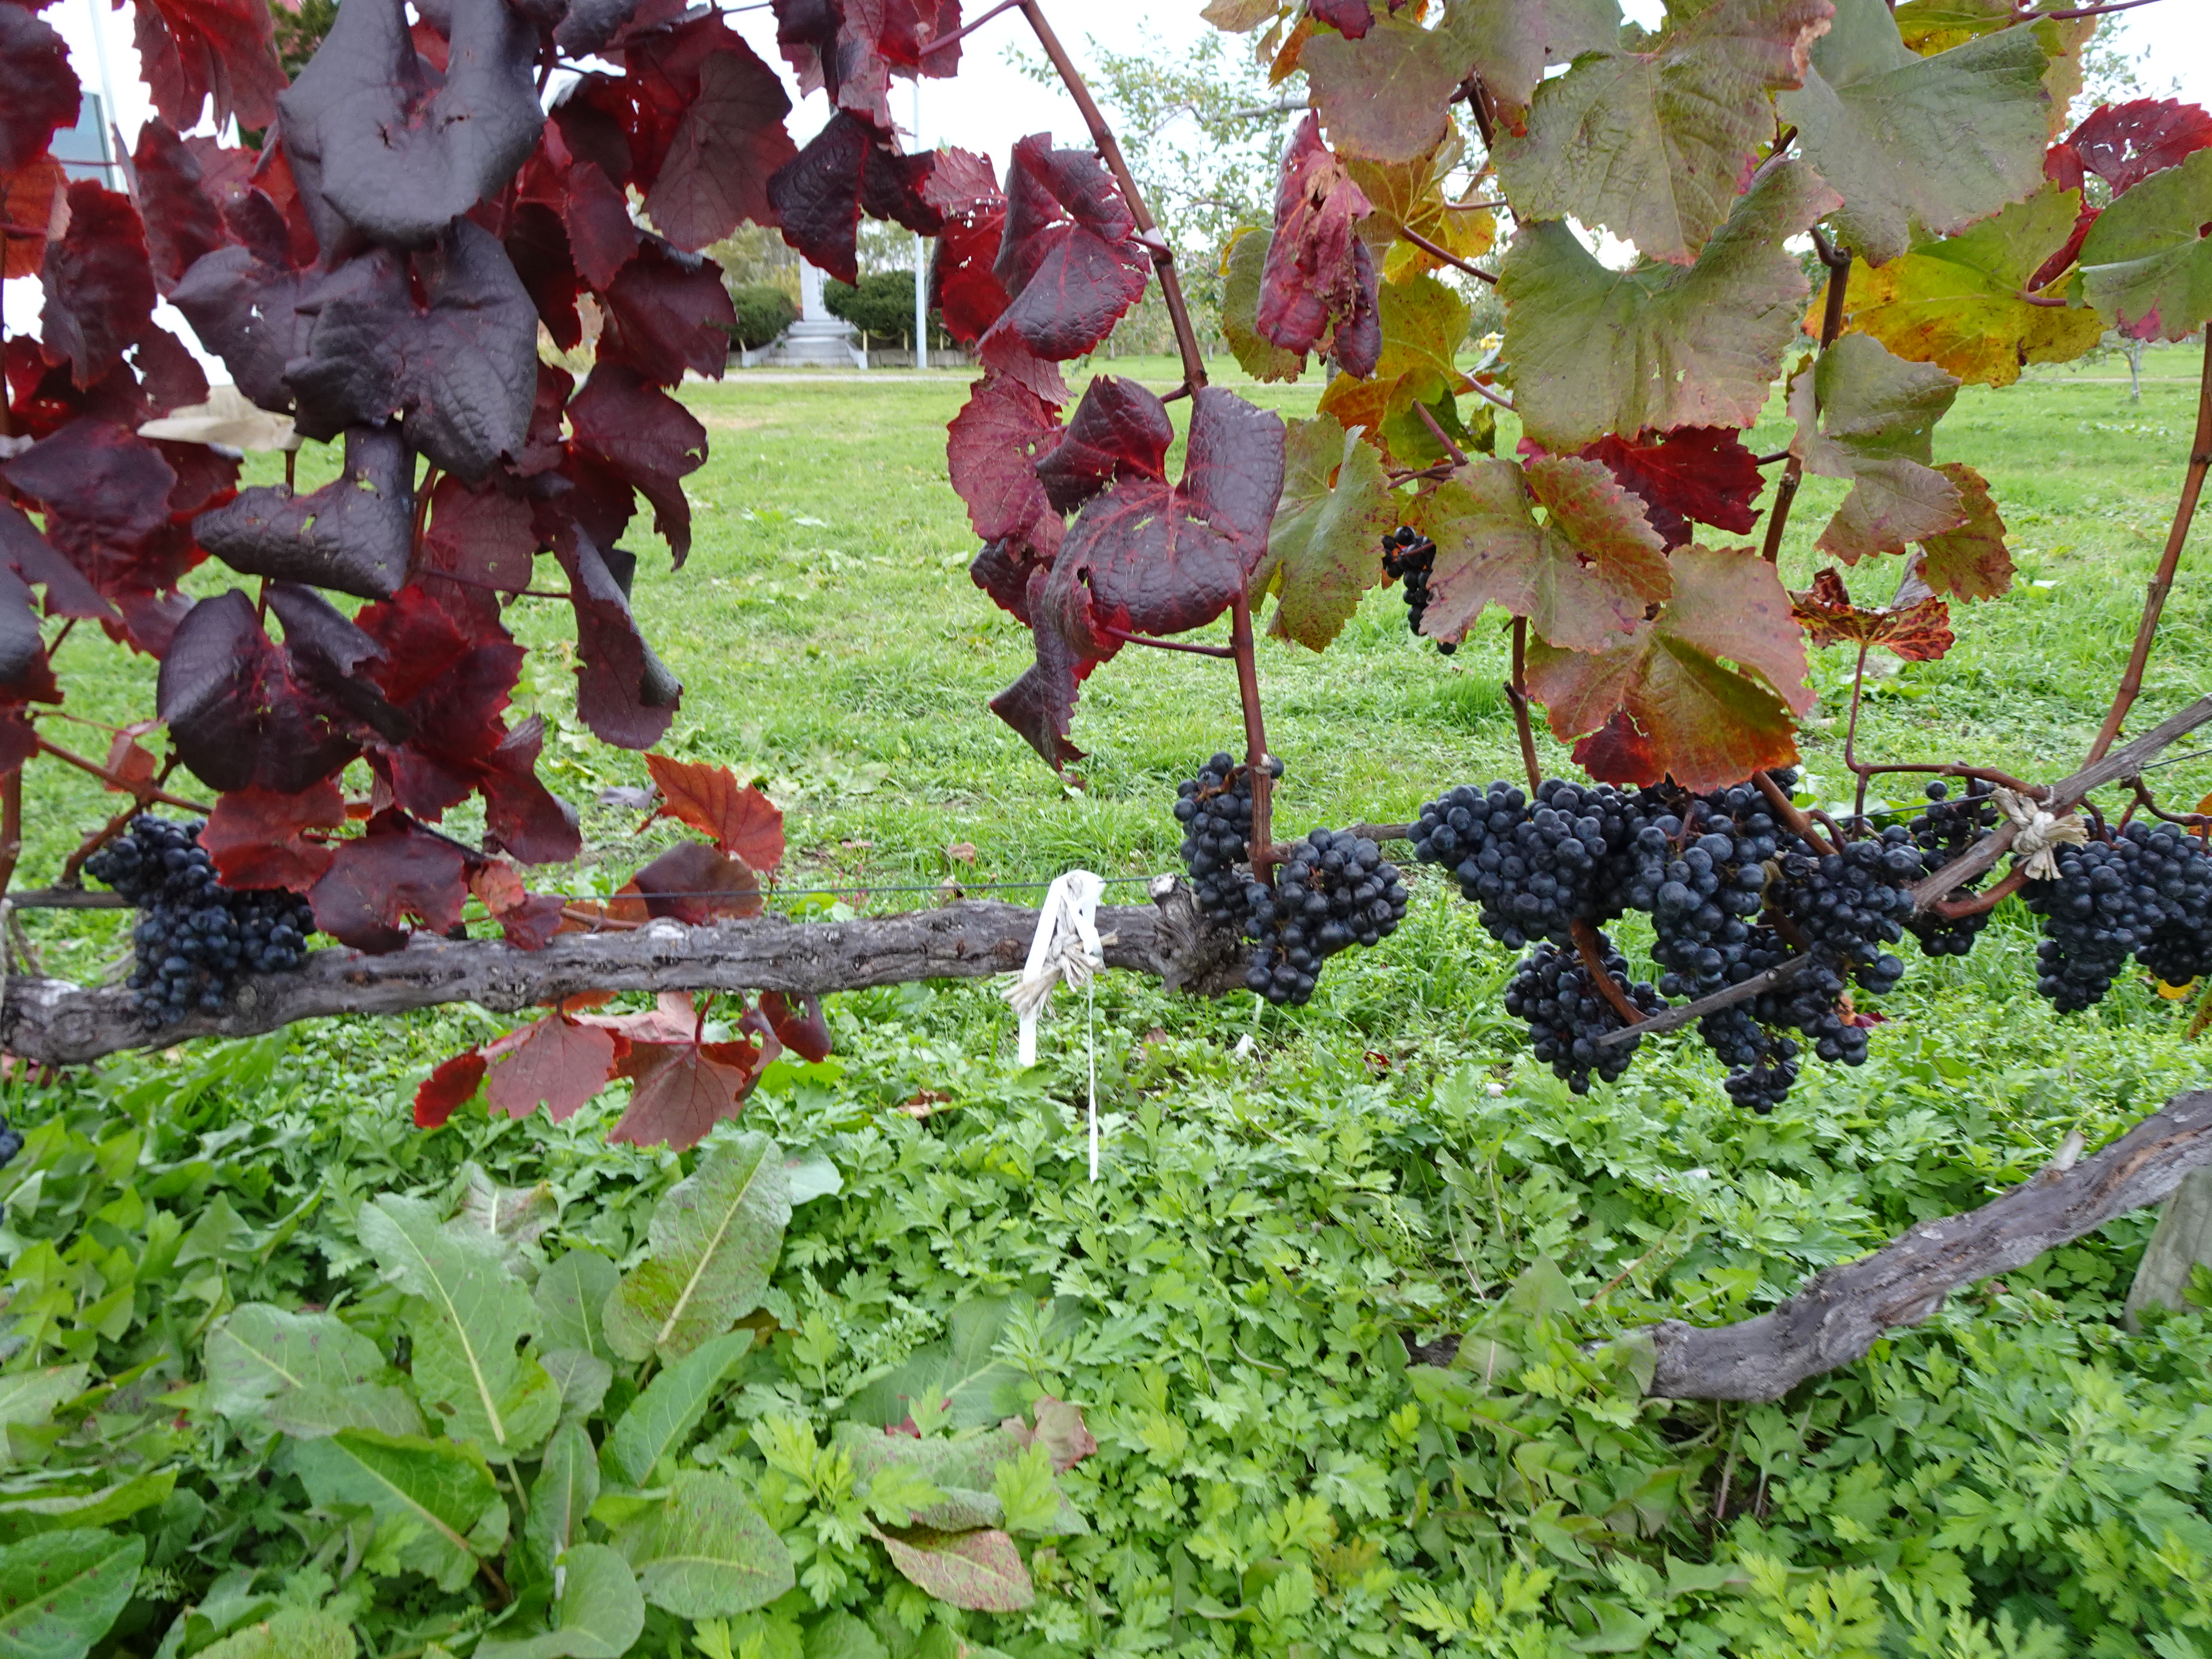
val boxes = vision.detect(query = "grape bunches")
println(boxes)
[1381,526,1462,657]
[1237,825,1411,1008]
[1780,961,1894,1073]
[0,1103,28,1177]
[1612,761,1801,1001]
[2132,818,2212,995]
[1174,746,1286,927]
[124,851,234,1034]
[1500,935,1675,1102]
[80,805,238,904]
[1871,772,2015,960]
[1691,986,1806,1119]
[1409,777,1646,952]
[1752,817,1928,998]
[2000,816,2167,1024]
[219,874,321,976]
